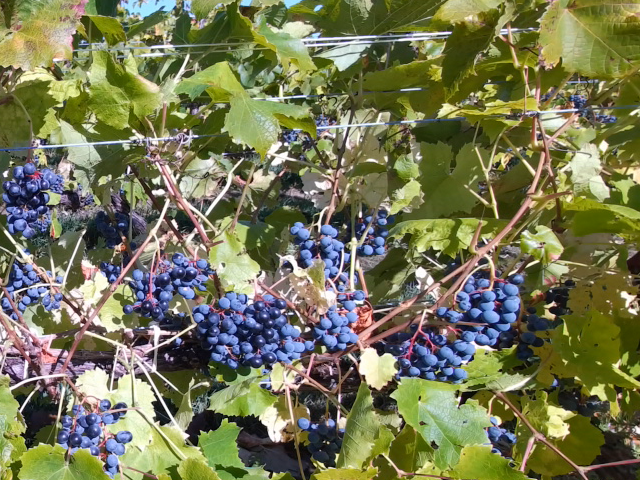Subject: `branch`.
<instances>
[{
  "label": "branch",
  "instance_id": "branch-4",
  "mask_svg": "<svg viewBox=\"0 0 640 480\" xmlns=\"http://www.w3.org/2000/svg\"><path fill=\"white\" fill-rule=\"evenodd\" d=\"M351 134H352V129H345L343 140L341 141L338 149V159H337V165H336V170H335L334 179H333L332 194H331L329 205L327 207V212L324 218V222L326 224H329L331 222L334 214V210L336 207V203L338 200L340 181H341L344 162H345V151H346L347 145L350 142Z\"/></svg>",
  "mask_w": 640,
  "mask_h": 480
},
{
  "label": "branch",
  "instance_id": "branch-1",
  "mask_svg": "<svg viewBox=\"0 0 640 480\" xmlns=\"http://www.w3.org/2000/svg\"><path fill=\"white\" fill-rule=\"evenodd\" d=\"M579 117H580V114L578 112H572L568 117L563 119L560 122V124L556 127V129L546 138V140H544L542 142V144L539 147V155H538V159H537L535 174H534V177H533V181L531 182L529 191L527 192L526 197L524 198V200L516 207L515 211L510 216V219L505 224V226L501 229V231L498 232L493 238H490L483 245H481L477 249V251L475 252L473 257L468 258L466 261H464L458 267H456L453 270L447 272L442 277H440L438 280L434 281L429 286H427L426 288H424L423 290H421L420 292H418L414 296L410 297L408 300H406L402 304L398 305L396 308H393L392 310H390L385 316L381 317L379 320H377L375 323H373L370 327H367L366 329H364L359 334V337L361 339H364L368 335L372 334L375 330L380 328L383 324L387 323L392 317L398 315L400 312L405 311L407 308L412 306L414 303L418 302L420 299H422L426 295L430 294L436 288H439L440 286H442L446 281H448L451 278L456 277L457 275L461 274L455 281H453L451 283V285L448 287L446 293L443 294L434 303V305L428 310V314L424 317L423 324H426L427 321L429 320V318L434 316L437 313V311L440 309V307L452 297V295H453L454 291L456 290V288L468 278V276L470 275L471 270L476 266V264L478 263L480 257L482 256V254L487 249H489L492 245H495L497 242H499L510 231L512 226L517 221V218L522 213L523 209L526 206H528L530 204V202L533 200V196L536 193V190L538 188V184L540 183V179H541V176H542V171H543L544 162H545V158H546V149H547V147L552 144V142L557 138V136H559L562 133V131L566 128L567 125H569L570 123H572L575 119H578ZM419 317H420V314H417L416 316H413L412 318H410V319H408V320H406V321H404V322H402L400 324H397V325H395L393 327H390V328H387V329H383L377 335H375L373 337H370V338H367V339H364L361 342H359L358 344H354V345L348 347V349L346 351H342V350L341 351H326L325 353L317 356L311 362V366L313 368H316L321 362H323L325 360H328L329 358L337 359V358H341V357H346L348 355L353 354L356 351H360L361 349H364L366 346L378 343L384 337L393 335L395 333H398L399 331H403L404 329L409 328L412 325L416 324L418 322V318Z\"/></svg>",
  "mask_w": 640,
  "mask_h": 480
},
{
  "label": "branch",
  "instance_id": "branch-3",
  "mask_svg": "<svg viewBox=\"0 0 640 480\" xmlns=\"http://www.w3.org/2000/svg\"><path fill=\"white\" fill-rule=\"evenodd\" d=\"M493 395L496 398L501 399L507 407L511 408L515 413H517L521 417L523 422L526 424V426L531 430V432L544 443V445L549 449V451L553 455H555L556 457L562 459L563 461L569 463L572 467H574L575 470L577 471V475L582 480L588 479V475L584 472V468L573 457L558 450L551 443L548 437L544 435L542 432H540V430L536 427V425L530 420L526 412L523 409H521L519 406H517L513 401H511L510 398L505 393L495 390L493 392Z\"/></svg>",
  "mask_w": 640,
  "mask_h": 480
},
{
  "label": "branch",
  "instance_id": "branch-7",
  "mask_svg": "<svg viewBox=\"0 0 640 480\" xmlns=\"http://www.w3.org/2000/svg\"><path fill=\"white\" fill-rule=\"evenodd\" d=\"M356 107H357V100L355 98H352L350 100V105H349V111L347 113V117H346V122L348 124H351L354 120V115L356 113Z\"/></svg>",
  "mask_w": 640,
  "mask_h": 480
},
{
  "label": "branch",
  "instance_id": "branch-5",
  "mask_svg": "<svg viewBox=\"0 0 640 480\" xmlns=\"http://www.w3.org/2000/svg\"><path fill=\"white\" fill-rule=\"evenodd\" d=\"M0 322H1L2 326H3V329H4L5 333H6V335L9 337V339H10V340H11V342H12V344L16 347V349H17V351H18L19 355L22 357V359L24 360V362H25L26 364H28V365L33 369V371L35 372V374H36L38 377H41V376H42V372L38 369L37 365H36V364H34V363H33V362L28 358L27 354H26V353H24V351H23V349H22L21 345L19 344V342L16 340V338H15V337H14V335H13V333H12V332H11V330L9 329L8 324H7V322H6V319H5V317H4L3 315H0Z\"/></svg>",
  "mask_w": 640,
  "mask_h": 480
},
{
  "label": "branch",
  "instance_id": "branch-6",
  "mask_svg": "<svg viewBox=\"0 0 640 480\" xmlns=\"http://www.w3.org/2000/svg\"><path fill=\"white\" fill-rule=\"evenodd\" d=\"M287 305L298 312L300 315H302L304 318L311 320L314 325L320 324V321L317 320L313 315L306 313L301 307L295 305L292 301H288Z\"/></svg>",
  "mask_w": 640,
  "mask_h": 480
},
{
  "label": "branch",
  "instance_id": "branch-2",
  "mask_svg": "<svg viewBox=\"0 0 640 480\" xmlns=\"http://www.w3.org/2000/svg\"><path fill=\"white\" fill-rule=\"evenodd\" d=\"M159 165L161 166L165 177L167 179V182L169 184V187L171 189V193L167 196L166 201L162 207V209L160 210L159 213V217L157 218L155 224L153 225L152 229L150 230V232L148 233V235L142 240L141 244L138 246V248L136 249L135 253L133 254L132 257H130L121 273L119 278L117 279V281L110 286L102 295L101 298L99 299L98 303L96 304L93 312L91 313V315L86 319V321L83 323V325L80 327V329L77 331L70 347L68 350V353L65 355L64 359H63V363L62 365L59 367V371L61 373H64L69 365H70V361L72 360V358L75 355V352L78 348L79 343L81 342L84 334L87 332L88 328L91 326V324L95 321V319L98 317V315L100 314V312L102 311L103 306L106 304L108 298L116 291L118 290L125 282L127 275L129 273V271L131 270L132 265L134 264L135 261H137L141 255L143 254L144 250L147 248L148 244L152 241V239L156 236L157 232L159 231V229L161 228L164 220L166 219V215L169 211V209L171 208V205L174 201V199L177 200L179 206L181 207V209L186 213L188 219L190 220V222L192 223V225L196 228L199 236L202 238L203 243L205 245H208L210 243V237L209 235L206 233V231L204 230V227L202 226V224L198 221L197 217L194 215L193 210L186 204V201L184 200V198L182 197L181 193L178 191V187L176 185V182L174 180V177L172 175V172L168 166V164L166 163V161L163 158H160L158 160Z\"/></svg>",
  "mask_w": 640,
  "mask_h": 480
},
{
  "label": "branch",
  "instance_id": "branch-8",
  "mask_svg": "<svg viewBox=\"0 0 640 480\" xmlns=\"http://www.w3.org/2000/svg\"><path fill=\"white\" fill-rule=\"evenodd\" d=\"M258 285L263 291L268 292L271 296H274V297H277V298L281 297V293L280 292L274 291L271 287L266 286L262 281H259Z\"/></svg>",
  "mask_w": 640,
  "mask_h": 480
}]
</instances>
